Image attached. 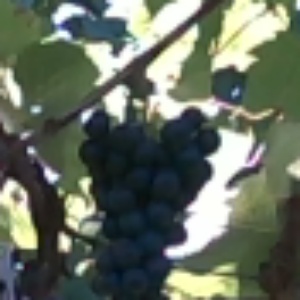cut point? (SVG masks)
<instances>
[{
	"instance_id": "6a23745f",
	"label": "cut point",
	"mask_w": 300,
	"mask_h": 300,
	"mask_svg": "<svg viewBox=\"0 0 300 300\" xmlns=\"http://www.w3.org/2000/svg\"><path fill=\"white\" fill-rule=\"evenodd\" d=\"M149 105V97L140 94L134 98V116L135 120L140 123L145 134L151 132V127L147 123V109Z\"/></svg>"
}]
</instances>
